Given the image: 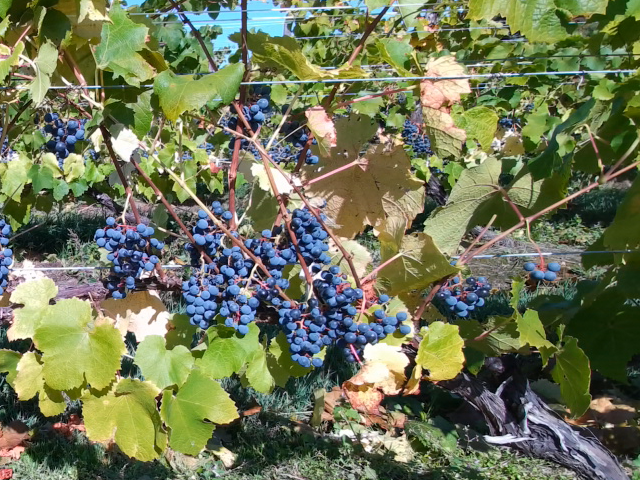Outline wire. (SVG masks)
I'll use <instances>...</instances> for the list:
<instances>
[{
	"label": "wire",
	"mask_w": 640,
	"mask_h": 480,
	"mask_svg": "<svg viewBox=\"0 0 640 480\" xmlns=\"http://www.w3.org/2000/svg\"><path fill=\"white\" fill-rule=\"evenodd\" d=\"M129 83L124 84H101V85H73V84H58L50 85V90L71 89V90H103V89H126L129 88Z\"/></svg>",
	"instance_id": "wire-4"
},
{
	"label": "wire",
	"mask_w": 640,
	"mask_h": 480,
	"mask_svg": "<svg viewBox=\"0 0 640 480\" xmlns=\"http://www.w3.org/2000/svg\"><path fill=\"white\" fill-rule=\"evenodd\" d=\"M639 248H604V249H586V250H561V251H543L542 255L547 257H556L563 255H588V254H606V253H639Z\"/></svg>",
	"instance_id": "wire-3"
},
{
	"label": "wire",
	"mask_w": 640,
	"mask_h": 480,
	"mask_svg": "<svg viewBox=\"0 0 640 480\" xmlns=\"http://www.w3.org/2000/svg\"><path fill=\"white\" fill-rule=\"evenodd\" d=\"M504 257H514V258L533 257V258H538L539 254L535 253V252H521V253H517V252H502V253H495V254L475 255L474 259L475 260H487V259H497V258H504Z\"/></svg>",
	"instance_id": "wire-5"
},
{
	"label": "wire",
	"mask_w": 640,
	"mask_h": 480,
	"mask_svg": "<svg viewBox=\"0 0 640 480\" xmlns=\"http://www.w3.org/2000/svg\"><path fill=\"white\" fill-rule=\"evenodd\" d=\"M640 74L639 68L621 69H586L577 71H529L512 73H465L461 75H436L424 77L379 76L365 78H330V79H302V80H241L243 85H304V84H333V83H367L381 81L426 82L438 80H463L467 78H514L531 76H579L588 74Z\"/></svg>",
	"instance_id": "wire-1"
},
{
	"label": "wire",
	"mask_w": 640,
	"mask_h": 480,
	"mask_svg": "<svg viewBox=\"0 0 640 480\" xmlns=\"http://www.w3.org/2000/svg\"><path fill=\"white\" fill-rule=\"evenodd\" d=\"M112 265H97V266H85V265H58L50 267H37V268H19L10 267V272L17 273H39V272H52L60 270H83V271H99V270H112Z\"/></svg>",
	"instance_id": "wire-2"
}]
</instances>
